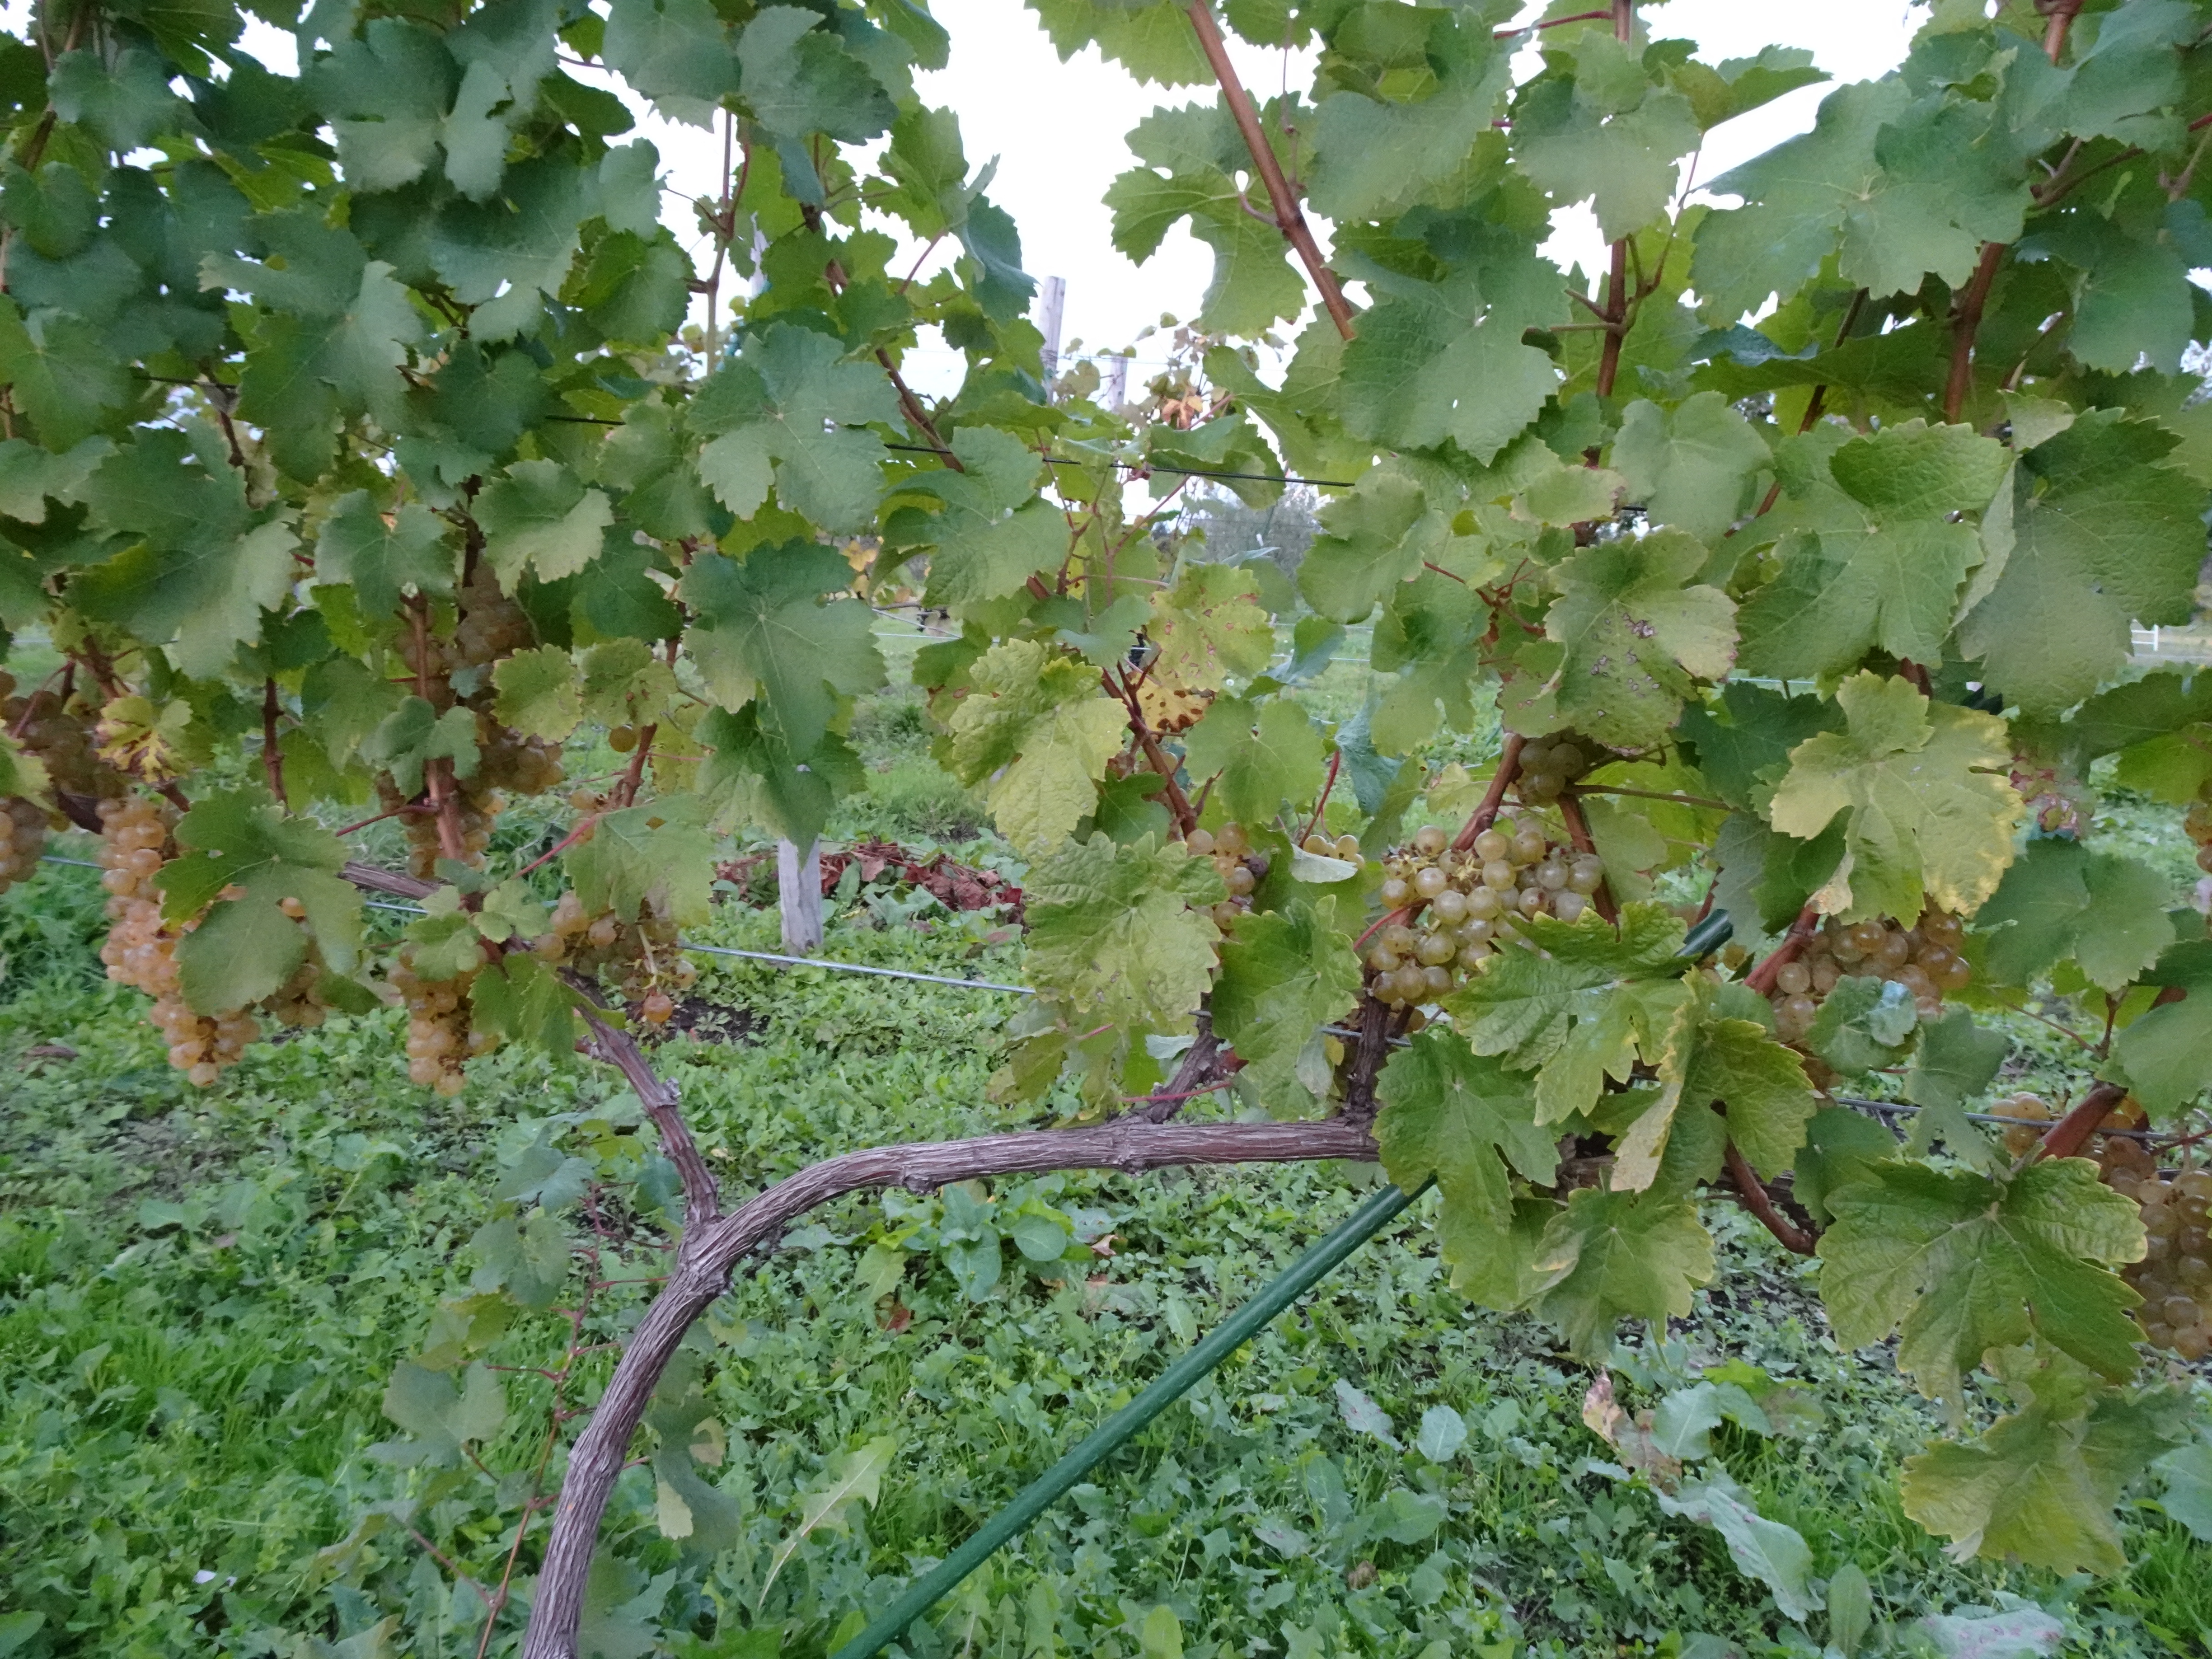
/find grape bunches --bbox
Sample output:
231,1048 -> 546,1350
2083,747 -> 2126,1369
211,1005 -> 263,1070
1184,824 -> 1258,931
256,896 -> 333,1030
1985,1087 -> 2060,1161
2185,802 -> 2212,881
479,716 -> 567,796
392,583 -> 465,684
371,767 -> 443,881
385,934 -> 505,1098
1833,913 -> 1974,1016
2,787 -> 70,896
459,551 -> 530,664
1381,818 -> 1606,950
1133,745 -> 1211,828
602,723 -> 648,757
95,903 -> 223,1089
555,780 -> 652,846
2071,1090 -> 2159,1206
96,793 -> 179,915
2128,1171 -> 2212,1365
0,669 -> 125,804
1382,1006 -> 1429,1034
607,916 -> 699,1026
441,763 -> 513,878
536,880 -> 620,979
1296,824 -> 1376,878
1359,906 -> 1496,1009
1501,724 -> 1602,807
1774,956 -> 1850,1041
